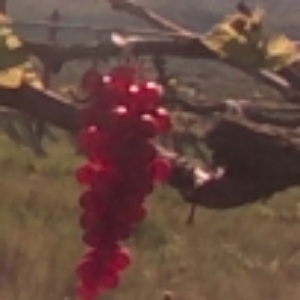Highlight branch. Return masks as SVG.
Masks as SVG:
<instances>
[{
  "label": "branch",
  "instance_id": "branch-2",
  "mask_svg": "<svg viewBox=\"0 0 300 300\" xmlns=\"http://www.w3.org/2000/svg\"><path fill=\"white\" fill-rule=\"evenodd\" d=\"M240 69L250 73L257 79L278 87L295 98H300V88L275 72H272L261 66H240Z\"/></svg>",
  "mask_w": 300,
  "mask_h": 300
},
{
  "label": "branch",
  "instance_id": "branch-1",
  "mask_svg": "<svg viewBox=\"0 0 300 300\" xmlns=\"http://www.w3.org/2000/svg\"><path fill=\"white\" fill-rule=\"evenodd\" d=\"M115 12L128 11L152 25L167 32L188 38L189 40H134L112 39L91 44L58 47L52 43L30 42L26 51L32 56L42 59L49 71L57 73L61 63L80 57H95L110 53H139L180 59H210L220 58L208 51L201 43L199 33L183 27L173 21L157 15L140 5H134L127 0H108Z\"/></svg>",
  "mask_w": 300,
  "mask_h": 300
}]
</instances>
